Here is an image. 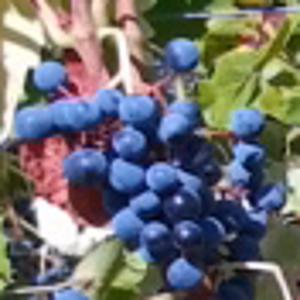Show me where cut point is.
Segmentation results:
<instances>
[{
	"label": "cut point",
	"mask_w": 300,
	"mask_h": 300,
	"mask_svg": "<svg viewBox=\"0 0 300 300\" xmlns=\"http://www.w3.org/2000/svg\"><path fill=\"white\" fill-rule=\"evenodd\" d=\"M100 31L101 39L109 36L117 40V49L119 55L118 73H115L108 80V86L110 88H115L122 82L124 94L126 96H131L133 94V89L131 80L128 76L126 35L113 27H103L100 29Z\"/></svg>",
	"instance_id": "cut-point-1"
}]
</instances>
